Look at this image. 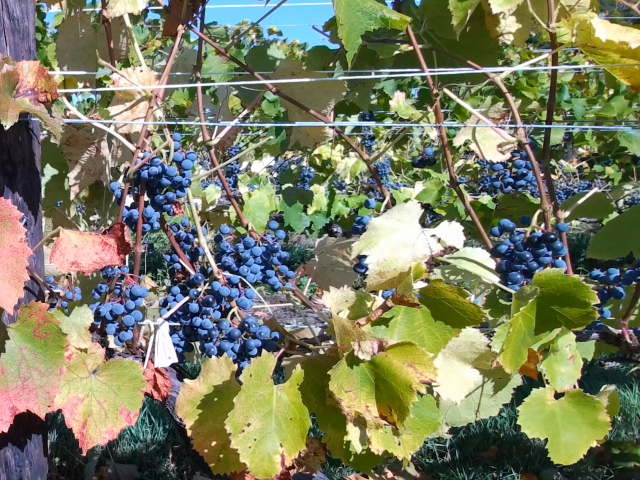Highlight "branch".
Segmentation results:
<instances>
[{
	"mask_svg": "<svg viewBox=\"0 0 640 480\" xmlns=\"http://www.w3.org/2000/svg\"><path fill=\"white\" fill-rule=\"evenodd\" d=\"M195 109L198 115L199 121H206L205 113L202 107V89H195Z\"/></svg>",
	"mask_w": 640,
	"mask_h": 480,
	"instance_id": "obj_21",
	"label": "branch"
},
{
	"mask_svg": "<svg viewBox=\"0 0 640 480\" xmlns=\"http://www.w3.org/2000/svg\"><path fill=\"white\" fill-rule=\"evenodd\" d=\"M557 82H558V72L556 70H553L551 72V79H550V83H549V97H548L547 106H546V113H545V123L546 124H551L552 123L553 108H554V103H555V99H556V85H557Z\"/></svg>",
	"mask_w": 640,
	"mask_h": 480,
	"instance_id": "obj_17",
	"label": "branch"
},
{
	"mask_svg": "<svg viewBox=\"0 0 640 480\" xmlns=\"http://www.w3.org/2000/svg\"><path fill=\"white\" fill-rule=\"evenodd\" d=\"M516 133L523 150L525 151L527 157L530 160V165H531L532 174L535 180V185H536V188L538 189V195L543 206L544 227L547 232H550L552 230V224H551V218H550V204L545 193V187L552 204V209H553V213L555 215L556 221L558 223H561L563 221L559 202H558V199L549 175L550 142H551L552 130L546 129L544 134L542 177L539 171L537 157L535 156L534 152L532 151V148L530 147L525 137L524 130L522 128H516Z\"/></svg>",
	"mask_w": 640,
	"mask_h": 480,
	"instance_id": "obj_2",
	"label": "branch"
},
{
	"mask_svg": "<svg viewBox=\"0 0 640 480\" xmlns=\"http://www.w3.org/2000/svg\"><path fill=\"white\" fill-rule=\"evenodd\" d=\"M484 76L489 80H494L496 86L501 91H504L505 97H506V101H507V103L509 105V109L511 110L513 121L516 122V123H522V120H521L520 115H519L518 108L516 106V103H515L513 95H512L511 88L507 84L503 83V81L501 80V78L499 77V75L497 73H491V72L484 73Z\"/></svg>",
	"mask_w": 640,
	"mask_h": 480,
	"instance_id": "obj_14",
	"label": "branch"
},
{
	"mask_svg": "<svg viewBox=\"0 0 640 480\" xmlns=\"http://www.w3.org/2000/svg\"><path fill=\"white\" fill-rule=\"evenodd\" d=\"M421 47L423 49H428V50H437L440 51L446 55H450L453 58L459 60L460 62L469 65L470 67L476 69V68H483V66L481 64H478L475 60L468 58L464 55H462L461 53L457 52L455 49L452 48H448L442 44L439 43H430V42H423L421 44Z\"/></svg>",
	"mask_w": 640,
	"mask_h": 480,
	"instance_id": "obj_15",
	"label": "branch"
},
{
	"mask_svg": "<svg viewBox=\"0 0 640 480\" xmlns=\"http://www.w3.org/2000/svg\"><path fill=\"white\" fill-rule=\"evenodd\" d=\"M426 81H427V84H428L429 89L431 91L432 101H433V105H434V109H435L436 121L437 122H442L443 121V112H442V107H441V103H440V99H439L438 88L436 87L435 81L431 76H428L426 78Z\"/></svg>",
	"mask_w": 640,
	"mask_h": 480,
	"instance_id": "obj_18",
	"label": "branch"
},
{
	"mask_svg": "<svg viewBox=\"0 0 640 480\" xmlns=\"http://www.w3.org/2000/svg\"><path fill=\"white\" fill-rule=\"evenodd\" d=\"M122 19L125 22V25H126L127 30H128L129 37L131 39V44H132V49H133V57H134L135 61L138 63V65L141 68H144L146 66V62L143 59L144 54L142 52H140L138 37L136 35L135 28H134V25L132 23L131 17L128 14H124L122 16Z\"/></svg>",
	"mask_w": 640,
	"mask_h": 480,
	"instance_id": "obj_16",
	"label": "branch"
},
{
	"mask_svg": "<svg viewBox=\"0 0 640 480\" xmlns=\"http://www.w3.org/2000/svg\"><path fill=\"white\" fill-rule=\"evenodd\" d=\"M164 89H153L150 97L149 106L145 108L144 118L150 121L155 113L157 100L162 101L164 99Z\"/></svg>",
	"mask_w": 640,
	"mask_h": 480,
	"instance_id": "obj_19",
	"label": "branch"
},
{
	"mask_svg": "<svg viewBox=\"0 0 640 480\" xmlns=\"http://www.w3.org/2000/svg\"><path fill=\"white\" fill-rule=\"evenodd\" d=\"M546 17H547V26H548V34L550 38L551 44V64H558L559 55H558V40L555 32V17L553 15V2L548 0L546 2Z\"/></svg>",
	"mask_w": 640,
	"mask_h": 480,
	"instance_id": "obj_13",
	"label": "branch"
},
{
	"mask_svg": "<svg viewBox=\"0 0 640 480\" xmlns=\"http://www.w3.org/2000/svg\"><path fill=\"white\" fill-rule=\"evenodd\" d=\"M200 134H201L202 145H203L205 151L209 154L212 165L215 168H218L220 166V163L218 161V157H217L216 151L211 147V145L209 143L208 132H207V127L206 126H201L200 127Z\"/></svg>",
	"mask_w": 640,
	"mask_h": 480,
	"instance_id": "obj_20",
	"label": "branch"
},
{
	"mask_svg": "<svg viewBox=\"0 0 640 480\" xmlns=\"http://www.w3.org/2000/svg\"><path fill=\"white\" fill-rule=\"evenodd\" d=\"M217 175H218V180H219L221 189L223 190L227 199L231 202L235 215L238 218L240 224L249 232L250 236L254 240H257L259 238V235L256 232V229L254 228V226L251 224V222L247 221L245 216L243 215L238 198L235 195H233V193L231 192L227 184L224 170L222 168H219L217 170Z\"/></svg>",
	"mask_w": 640,
	"mask_h": 480,
	"instance_id": "obj_9",
	"label": "branch"
},
{
	"mask_svg": "<svg viewBox=\"0 0 640 480\" xmlns=\"http://www.w3.org/2000/svg\"><path fill=\"white\" fill-rule=\"evenodd\" d=\"M145 185L146 182L141 180L138 183V214L136 219L135 243L133 248V267L131 269V280L134 283L139 281L138 272L140 270V250L142 245L143 221L145 216Z\"/></svg>",
	"mask_w": 640,
	"mask_h": 480,
	"instance_id": "obj_7",
	"label": "branch"
},
{
	"mask_svg": "<svg viewBox=\"0 0 640 480\" xmlns=\"http://www.w3.org/2000/svg\"><path fill=\"white\" fill-rule=\"evenodd\" d=\"M439 138H440V141H441L443 154H444V157H445V160H446V172H447L448 178H449L451 184L454 186V189L456 190V192L460 196L463 204L465 205V208L468 210L469 214L471 215L474 228L477 230V232H478V234L480 236L481 242L486 246V248L488 250H492L494 248V245L492 244V242L490 240H488L487 233L485 232V229L481 225V222H480L478 213L476 212V209L474 208V206L470 202L466 192L464 191V189L461 186V183L457 180V178L455 176L454 169H453V158H452V154H451V151H450L449 142H448V139H447L446 128L445 127H440L439 128Z\"/></svg>",
	"mask_w": 640,
	"mask_h": 480,
	"instance_id": "obj_3",
	"label": "branch"
},
{
	"mask_svg": "<svg viewBox=\"0 0 640 480\" xmlns=\"http://www.w3.org/2000/svg\"><path fill=\"white\" fill-rule=\"evenodd\" d=\"M267 90L270 94L274 96H278L281 99L291 103L293 106L300 108L304 112H308L311 115H314L321 119L322 121L331 120L325 113L320 110L311 107L310 105L304 104L302 101L295 99L293 96L287 94L286 92L281 91L280 89H276L272 85L267 87Z\"/></svg>",
	"mask_w": 640,
	"mask_h": 480,
	"instance_id": "obj_11",
	"label": "branch"
},
{
	"mask_svg": "<svg viewBox=\"0 0 640 480\" xmlns=\"http://www.w3.org/2000/svg\"><path fill=\"white\" fill-rule=\"evenodd\" d=\"M99 16L102 18L103 28L105 32V37L107 41V47L109 49V65L112 68L117 66L116 62V47L114 45V39L112 35V30L109 21V11L107 10V1H100V13Z\"/></svg>",
	"mask_w": 640,
	"mask_h": 480,
	"instance_id": "obj_10",
	"label": "branch"
},
{
	"mask_svg": "<svg viewBox=\"0 0 640 480\" xmlns=\"http://www.w3.org/2000/svg\"><path fill=\"white\" fill-rule=\"evenodd\" d=\"M186 202L188 205V209H189V213H190V218L193 224V227L195 229V234L196 237L198 239V242L201 246L202 251L204 252L208 263L212 266L215 275L217 277V280L220 282V284L222 286H225L227 284V280L224 277L221 267L220 265L216 262L202 231V227L201 224L199 222L198 219V215H197V211H196V207H195V203H194V199H193V193H192V189L190 187L186 188Z\"/></svg>",
	"mask_w": 640,
	"mask_h": 480,
	"instance_id": "obj_5",
	"label": "branch"
},
{
	"mask_svg": "<svg viewBox=\"0 0 640 480\" xmlns=\"http://www.w3.org/2000/svg\"><path fill=\"white\" fill-rule=\"evenodd\" d=\"M161 132L163 134V139L165 141L166 150L170 153H173L175 151V148L173 147L172 139H171L168 127L166 125H163L161 127Z\"/></svg>",
	"mask_w": 640,
	"mask_h": 480,
	"instance_id": "obj_22",
	"label": "branch"
},
{
	"mask_svg": "<svg viewBox=\"0 0 640 480\" xmlns=\"http://www.w3.org/2000/svg\"><path fill=\"white\" fill-rule=\"evenodd\" d=\"M153 3L160 8H162L171 18L178 21L177 23V31L176 35L171 43L169 52L167 54L166 60L162 66L160 77L161 83H168V72L169 68L174 60V56L176 54L178 45L183 37V33L185 29L189 33H195L198 35V49L196 54V82H203V57L204 51L207 41L212 45L214 49L220 52L223 56L227 57L232 63H234L237 67H239L242 71L253 77L254 79H261L262 75L257 73L254 69L247 66L244 62H242L239 58H237L233 53L227 50L224 46H222L219 42H217L212 36L205 33L204 28V20L206 18V14L208 11V6L203 4L199 11V16L197 18V26L189 23L188 20V12L190 6V0H183L181 15L175 12L168 4H166L162 0H153Z\"/></svg>",
	"mask_w": 640,
	"mask_h": 480,
	"instance_id": "obj_1",
	"label": "branch"
},
{
	"mask_svg": "<svg viewBox=\"0 0 640 480\" xmlns=\"http://www.w3.org/2000/svg\"><path fill=\"white\" fill-rule=\"evenodd\" d=\"M149 131V126H142L141 131L137 133V141L134 147V151L132 154V159L130 161V165L128 168V172L125 176V182L123 184V189L119 198L118 207L116 210V221L121 223L123 221V213L126 205V200L128 194L130 192V186L132 184V179L135 175V170L137 167V163L139 161V156L141 153V149L144 152H148L152 146L153 134Z\"/></svg>",
	"mask_w": 640,
	"mask_h": 480,
	"instance_id": "obj_4",
	"label": "branch"
},
{
	"mask_svg": "<svg viewBox=\"0 0 640 480\" xmlns=\"http://www.w3.org/2000/svg\"><path fill=\"white\" fill-rule=\"evenodd\" d=\"M331 131L333 133L338 134L341 138H343L344 141L356 152V154L358 155L359 159L365 163L366 167L370 171V174H371V177H372L373 181L376 184V187L378 189V192H379L380 196L382 197L383 201L385 202V208L387 210H391L393 208V202L391 200V196L385 190V186H384L382 180L380 179V177L378 175V172H377V169L373 165V163L370 160L369 156L366 153H364V151L359 147V145L357 143H355L351 139V137L343 129H341L340 127L333 126L331 128Z\"/></svg>",
	"mask_w": 640,
	"mask_h": 480,
	"instance_id": "obj_6",
	"label": "branch"
},
{
	"mask_svg": "<svg viewBox=\"0 0 640 480\" xmlns=\"http://www.w3.org/2000/svg\"><path fill=\"white\" fill-rule=\"evenodd\" d=\"M158 221L162 229L164 230L168 241L172 245V248L174 249L175 253L179 256L180 260L182 261L184 267L188 270L190 274H194L196 272V269L193 267V265L190 263L189 259L187 258L186 254L181 249L179 242L176 240L173 234V231L169 227L165 217L163 215H160L158 217Z\"/></svg>",
	"mask_w": 640,
	"mask_h": 480,
	"instance_id": "obj_12",
	"label": "branch"
},
{
	"mask_svg": "<svg viewBox=\"0 0 640 480\" xmlns=\"http://www.w3.org/2000/svg\"><path fill=\"white\" fill-rule=\"evenodd\" d=\"M406 33L408 34V39L404 38H369L365 34L360 36V40L367 45H401L408 46L411 44L414 53L416 54L417 60L423 72L428 70V64L424 58V54L421 51L417 38L415 36V32L411 27L406 29Z\"/></svg>",
	"mask_w": 640,
	"mask_h": 480,
	"instance_id": "obj_8",
	"label": "branch"
}]
</instances>
